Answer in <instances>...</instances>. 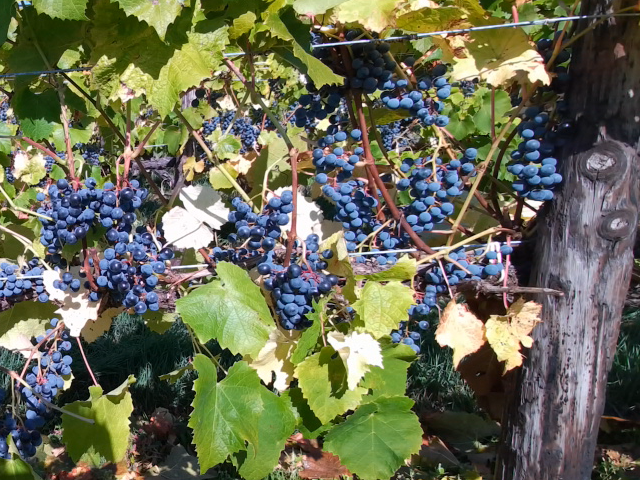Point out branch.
Instances as JSON below:
<instances>
[{
    "mask_svg": "<svg viewBox=\"0 0 640 480\" xmlns=\"http://www.w3.org/2000/svg\"><path fill=\"white\" fill-rule=\"evenodd\" d=\"M541 85V80L537 79L536 83L526 92V94L520 98V100L518 101V103L515 105V109L512 112L511 116L508 118L507 122L504 123V125L501 127L498 136L496 137L494 143L488 148L484 160L476 174L475 177V181L474 183H472L471 181L467 180L465 178V176L462 173L458 174V177L460 179V181L462 183H464V189L468 190L469 193L466 196L464 202L461 205V208L459 210V213L455 219V221L452 218H448L447 222L452 225L451 230H450V234L447 238L446 241V246L450 247L449 251H442L440 253H436V251H431L430 250V246H427L426 243L423 241V239L416 233V231L402 218L393 198L391 197L390 193L388 192V190L386 189V186L382 180V178L380 177V174L377 170V166L374 162L373 159V153L371 150V147L369 145V138H368V130H367V124H366V120H365V113H364V109L362 107V98L361 96L363 95L366 99H365V104L368 106L369 108V117H370V121H371V126L372 129L374 131L375 134V138L377 140V143L381 149V151L384 154V158L386 159L387 163L398 173V175L403 179L406 180L407 179V175L399 168V166L392 160L391 156L389 155V152L386 148V146L383 143V140L381 138L380 135V131L379 128L377 126L376 123V119H375V114H374V101L372 99V97L370 96L369 93H367V91L364 88L361 89H354L353 91L350 89L349 85L345 86V92H346V102L350 111V118H351V122L353 124V128L357 129L358 128V123L360 126V133H361V140H362V148L365 152L366 155V161L368 166L365 167V172L367 174V183L370 187V194L374 197L377 198L379 201V205L376 206V211L379 214L378 219L381 221L382 224H385L387 221V218L384 215V212L382 211L381 208V203H380V199L378 197V192L376 190V186L375 183L378 186V189L381 193V195L383 196V198L386 200V203L388 204L396 222L402 227L404 228V230L410 235V237L413 239V243L415 245H418L419 247L422 248V250L429 254L430 256H427L426 258H423L421 260H417L416 264L417 265H423L428 263L429 261L432 260H436L439 258L444 257L445 255L450 254L451 252L459 249L462 247L463 244H467L473 240H476L477 243H485L481 237L484 235H488L491 233H498V232H507L509 234H511L512 236H516L517 232L514 229L509 228V226L506 224V220L503 218L504 214L501 212V209L499 207V204L497 202L496 199V187H495V182L499 173V167H500V162L501 159L503 157V154L507 151L509 145L512 143L514 137L516 136V134L518 133V129L514 128L510 135L508 136L507 140L505 141V143L503 144L501 150L498 152V155L495 159V164H494V170H493V174L490 180V190H491V202L493 204V207L491 204H489L486 199L481 196L480 194H478L476 192L479 184H480V179L482 177V174L484 172V170L486 169V166L488 165L489 159L491 157V154L493 153V151L495 150V148L499 145L500 141L502 140L506 130L509 128V126L512 124L513 120L516 119V116L518 115V113L520 112L522 106L525 104L526 100L529 99V97L538 89V87ZM475 197L477 199V202L479 203V205L488 213H490L494 218H496L498 221H500V223L502 224V227H495V228H489V229H485L482 230L476 234H474L473 232L467 230L465 227L461 226L459 223L462 220L465 210L468 206V204L470 203V200L472 199V197ZM456 229H458L459 231L463 232L465 235H467L468 237L465 238L464 240L460 241L459 243L451 246V243L454 239L455 236V232Z\"/></svg>",
    "mask_w": 640,
    "mask_h": 480,
    "instance_id": "1",
    "label": "branch"
},
{
    "mask_svg": "<svg viewBox=\"0 0 640 480\" xmlns=\"http://www.w3.org/2000/svg\"><path fill=\"white\" fill-rule=\"evenodd\" d=\"M13 239L16 240L17 242H19L22 246H24L25 248H27L41 263L42 267L44 270L46 271H51L52 267L47 265V262L45 261V259L43 258V256L38 253L35 248L29 244L28 242H26L22 237H20L19 235H14Z\"/></svg>",
    "mask_w": 640,
    "mask_h": 480,
    "instance_id": "10",
    "label": "branch"
},
{
    "mask_svg": "<svg viewBox=\"0 0 640 480\" xmlns=\"http://www.w3.org/2000/svg\"><path fill=\"white\" fill-rule=\"evenodd\" d=\"M569 25H570V21L566 20L564 22V25H563V30H562V32L560 33V35H559V37L557 39L556 45H555V47L553 49V52L551 53V56L549 57V59L545 63V66H544V70L545 71H548L550 69L551 64L554 62V60H555V58H556V56H557V54H558V52L560 50L561 44L563 42V39L566 36V34L568 33Z\"/></svg>",
    "mask_w": 640,
    "mask_h": 480,
    "instance_id": "8",
    "label": "branch"
},
{
    "mask_svg": "<svg viewBox=\"0 0 640 480\" xmlns=\"http://www.w3.org/2000/svg\"><path fill=\"white\" fill-rule=\"evenodd\" d=\"M173 113L177 117H179L182 120V122L187 126V128L189 129V131L191 132L193 137L196 139L198 145L207 153L206 157L208 158V160L210 162H212V164L215 167H218L221 175L226 180H228L232 184V186L236 189V191L245 199L247 204L251 207L252 211L254 213H256V214H259L260 213V209L257 208V206L254 203V201L246 194L245 191H243V189L235 181V179L228 173V171L224 169L222 163L218 159V156L214 154V151L212 149H210L209 147L206 146V144L202 141L201 137L199 136V134L197 133L196 129L191 124V122L186 118V116L182 112H180L178 110V106L177 105L173 106Z\"/></svg>",
    "mask_w": 640,
    "mask_h": 480,
    "instance_id": "4",
    "label": "branch"
},
{
    "mask_svg": "<svg viewBox=\"0 0 640 480\" xmlns=\"http://www.w3.org/2000/svg\"><path fill=\"white\" fill-rule=\"evenodd\" d=\"M387 56L389 57V61L394 64V71L398 75L399 79L400 80L405 79L407 81L408 86L406 87V90L408 92H413L414 85L412 82V78L407 74L405 70L399 68V61L396 58H394V55L391 51L387 52Z\"/></svg>",
    "mask_w": 640,
    "mask_h": 480,
    "instance_id": "7",
    "label": "branch"
},
{
    "mask_svg": "<svg viewBox=\"0 0 640 480\" xmlns=\"http://www.w3.org/2000/svg\"><path fill=\"white\" fill-rule=\"evenodd\" d=\"M135 162L142 174L143 179L147 182V184L149 185V187L151 188V190L156 194V196L164 203V204H168L169 200L158 190V188L156 187V185L153 183V181L149 178V176L147 175V171L142 163V161L139 158L135 159Z\"/></svg>",
    "mask_w": 640,
    "mask_h": 480,
    "instance_id": "9",
    "label": "branch"
},
{
    "mask_svg": "<svg viewBox=\"0 0 640 480\" xmlns=\"http://www.w3.org/2000/svg\"><path fill=\"white\" fill-rule=\"evenodd\" d=\"M65 80L70 83L74 89L80 92L85 99L89 100L94 104L96 109L104 116L106 121L111 125L112 129L118 134L123 143L126 145L125 151L123 154L124 161V170H123V180L122 187L126 188L128 185V177H129V167L130 162L132 161V152L134 151L133 146L131 145V122H132V100H127V120H126V136L122 132V130L116 125L114 120L110 117V115L104 110L98 100L88 94L86 90H84L78 83L72 79L67 73L62 72L59 73L57 77L58 82V91L60 97V123L62 129L63 140L66 147L67 159L69 162V177L74 179L76 177V160L73 152L72 140L70 138L68 121H67V95L65 89Z\"/></svg>",
    "mask_w": 640,
    "mask_h": 480,
    "instance_id": "2",
    "label": "branch"
},
{
    "mask_svg": "<svg viewBox=\"0 0 640 480\" xmlns=\"http://www.w3.org/2000/svg\"><path fill=\"white\" fill-rule=\"evenodd\" d=\"M64 326L63 322H59L54 328H52L51 330H49L48 332H46L40 339L39 341L35 344V346L30 350V352L28 353L24 363L21 366V369L18 372V378L22 379L23 375L27 369V367L29 366V363L33 357V355L39 350V348L43 345V343L53 334H55L56 332H58L62 327Z\"/></svg>",
    "mask_w": 640,
    "mask_h": 480,
    "instance_id": "5",
    "label": "branch"
},
{
    "mask_svg": "<svg viewBox=\"0 0 640 480\" xmlns=\"http://www.w3.org/2000/svg\"><path fill=\"white\" fill-rule=\"evenodd\" d=\"M432 129L434 130L435 134L438 136L440 143L442 145V148L445 150L446 154L448 155V157L450 159H454L455 158V154L453 151L450 150V148L448 147L446 140L442 134V132L440 131L439 127L436 124L432 125Z\"/></svg>",
    "mask_w": 640,
    "mask_h": 480,
    "instance_id": "11",
    "label": "branch"
},
{
    "mask_svg": "<svg viewBox=\"0 0 640 480\" xmlns=\"http://www.w3.org/2000/svg\"><path fill=\"white\" fill-rule=\"evenodd\" d=\"M82 258H83V264H84L86 276L89 282L92 284L91 289L92 290L97 289L100 293H103L104 288L95 281V279L91 274V270L88 262V255H87V238L86 237L82 238Z\"/></svg>",
    "mask_w": 640,
    "mask_h": 480,
    "instance_id": "6",
    "label": "branch"
},
{
    "mask_svg": "<svg viewBox=\"0 0 640 480\" xmlns=\"http://www.w3.org/2000/svg\"><path fill=\"white\" fill-rule=\"evenodd\" d=\"M223 63L227 65L237 76L243 88L250 94L253 98L254 102L257 104L259 109L263 111L271 121V124L278 131L279 136L285 142V145L288 147L290 151V161L292 164L291 167V201L295 206V210L291 212L290 217V236L289 241L285 248L284 258L282 260V266L287 268L289 266L292 250L296 243L297 239V220H298V212H297V201H298V169H299V161L297 159V155L299 154V150L295 147L290 137L286 134L285 129L278 122L274 112L265 105L260 96L257 94L255 89L248 83L244 73L242 70L229 58H225Z\"/></svg>",
    "mask_w": 640,
    "mask_h": 480,
    "instance_id": "3",
    "label": "branch"
},
{
    "mask_svg": "<svg viewBox=\"0 0 640 480\" xmlns=\"http://www.w3.org/2000/svg\"><path fill=\"white\" fill-rule=\"evenodd\" d=\"M580 0H574L573 6L571 7L570 11H569V15H574L576 9L578 8Z\"/></svg>",
    "mask_w": 640,
    "mask_h": 480,
    "instance_id": "12",
    "label": "branch"
}]
</instances>
